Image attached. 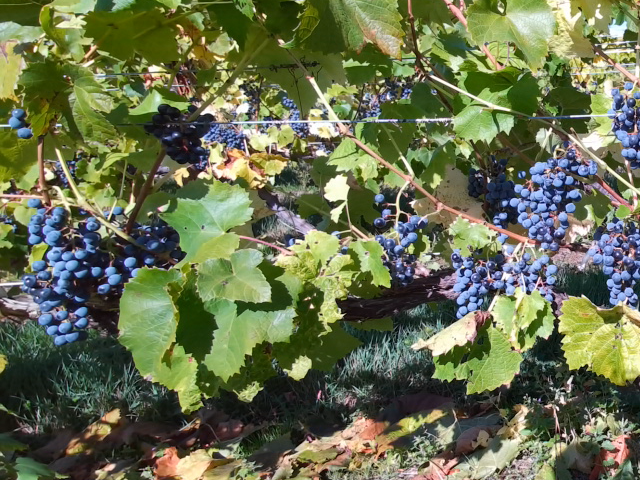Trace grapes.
<instances>
[{
  "label": "grapes",
  "mask_w": 640,
  "mask_h": 480,
  "mask_svg": "<svg viewBox=\"0 0 640 480\" xmlns=\"http://www.w3.org/2000/svg\"><path fill=\"white\" fill-rule=\"evenodd\" d=\"M27 205L31 209H36L29 218L27 232L31 235L28 238L30 245H40L45 242L50 246L44 251L45 258L52 267V273L45 271L48 264L44 260L35 261L31 269L35 274H27L21 277L24 285L20 290L24 294L32 296V302L39 305L40 311L44 314L38 319L40 326H46L45 333L54 336L56 346H66L68 343L76 341H86L89 334L86 331H73L87 328L90 319V308L86 305H77L72 313L77 319L72 322H62L66 320L70 313L61 310L55 315L51 312L55 307H60L65 300L71 299L73 304H82L89 299V293L83 289H74V279H83L88 275L93 278H105V283L97 287L99 295H105L111 287L117 286L122 281L128 283L139 272L138 260L135 257L137 248L127 244L123 248L125 256L116 257L109 266V255L97 250V245L101 242L102 236L96 232L101 229V224L95 217H88L86 223L80 226L83 236L77 240V244L82 249L65 251L63 247V232L61 225L65 223L67 210L64 207H54L50 210L43 207L40 198H30ZM49 281L52 279L50 287H42L37 284L38 280Z\"/></svg>",
  "instance_id": "obj_1"
},
{
  "label": "grapes",
  "mask_w": 640,
  "mask_h": 480,
  "mask_svg": "<svg viewBox=\"0 0 640 480\" xmlns=\"http://www.w3.org/2000/svg\"><path fill=\"white\" fill-rule=\"evenodd\" d=\"M572 145L570 140L563 143L565 148ZM561 167L563 170L572 172L583 178L594 176L598 171V163L590 158L587 164H581L577 159V152L573 148H569L564 158H549L545 162H535L530 168V180L540 186L536 191H531L523 184H516L513 180L506 181V174L501 172L496 177V183L488 182L486 189V200L493 204L495 200H500L499 205L503 208L509 206L513 210V216L509 217L506 211L496 212L492 216V222L500 229H506L508 224H521L523 229H527V237L532 240H538L542 243L543 249H550L552 252H558L561 245L557 239L563 240L570 224L567 221V213H575L577 205L569 202L565 205L564 210L558 214V227H553L554 220L550 217V211H557L558 204L562 199L574 200L580 202L583 194L576 188L564 189L574 185L578 187L580 181L571 174L564 171L550 172L544 175L549 169Z\"/></svg>",
  "instance_id": "obj_2"
},
{
  "label": "grapes",
  "mask_w": 640,
  "mask_h": 480,
  "mask_svg": "<svg viewBox=\"0 0 640 480\" xmlns=\"http://www.w3.org/2000/svg\"><path fill=\"white\" fill-rule=\"evenodd\" d=\"M449 259L452 261V267L457 272V281L455 283L454 291L459 294L455 299L456 317L462 319L469 312L476 311L479 307L485 304L483 298H478L477 295L485 296L490 289H505L507 295H511L515 292L516 286L513 284L516 281V277L511 275L505 282L501 279L506 273L514 271L519 276L517 281L520 284L526 282V285L521 287L523 292H533L535 285L540 279L538 272H541L544 265L550 262V256L548 254H542L539 258H536L532 264H528L532 259L529 253H524L520 260L515 265L510 263H504L505 257L502 254H498L496 257H490L485 266H476L474 271L472 268L475 266V258L473 256L461 255L459 249H454L449 254Z\"/></svg>",
  "instance_id": "obj_3"
},
{
  "label": "grapes",
  "mask_w": 640,
  "mask_h": 480,
  "mask_svg": "<svg viewBox=\"0 0 640 480\" xmlns=\"http://www.w3.org/2000/svg\"><path fill=\"white\" fill-rule=\"evenodd\" d=\"M627 226L628 229L625 230V222L617 216H614L612 221H608L606 229L610 233L622 234L624 232V236L627 237L626 240L623 236H614L611 241L610 236L603 233L604 229L598 227L592 236V239L597 241V248L591 247L587 254L593 257V262L596 265H606L603 268V273L609 277L605 283L606 289L610 291L609 304L617 306L619 302L628 299V305L632 309H636L639 297L634 288L627 286L621 291L622 284L620 283L625 280L628 285H635L640 279V230L633 222H628ZM615 247H621L626 252L634 247V258L627 254L622 255V252L616 250Z\"/></svg>",
  "instance_id": "obj_4"
},
{
  "label": "grapes",
  "mask_w": 640,
  "mask_h": 480,
  "mask_svg": "<svg viewBox=\"0 0 640 480\" xmlns=\"http://www.w3.org/2000/svg\"><path fill=\"white\" fill-rule=\"evenodd\" d=\"M213 120L214 117L211 114H201L197 117V121L199 123L203 122V124H198L196 128H186L184 130L187 140L192 143L186 146V150L181 148L183 146V134L176 126L146 124L144 129L149 133H153L159 141L164 142L167 147L163 150V153L171 161L176 160L179 164H187L188 162L195 164L200 161V156L206 154V150L201 147V138H204L210 132L211 126L207 123Z\"/></svg>",
  "instance_id": "obj_5"
},
{
  "label": "grapes",
  "mask_w": 640,
  "mask_h": 480,
  "mask_svg": "<svg viewBox=\"0 0 640 480\" xmlns=\"http://www.w3.org/2000/svg\"><path fill=\"white\" fill-rule=\"evenodd\" d=\"M611 95L614 97V103L608 112H622V116L609 117L615 120V123L610 125V129L621 141L623 147H630L624 148L621 156L631 161L630 168L636 171L640 168V105L635 109L633 107L636 105V100L640 99V91H635L632 97H628L626 104L619 88H613Z\"/></svg>",
  "instance_id": "obj_6"
},
{
  "label": "grapes",
  "mask_w": 640,
  "mask_h": 480,
  "mask_svg": "<svg viewBox=\"0 0 640 480\" xmlns=\"http://www.w3.org/2000/svg\"><path fill=\"white\" fill-rule=\"evenodd\" d=\"M428 225L426 218H420L418 215H412L409 222L399 221L397 223L399 244H396L394 238H387L383 235L376 234L374 239L386 250V257L394 262L396 273L395 278H399L404 285L409 284L408 280L414 277V268L406 267L405 264H412L417 260L415 254L403 253L410 244H414L418 240L416 230H423Z\"/></svg>",
  "instance_id": "obj_7"
},
{
  "label": "grapes",
  "mask_w": 640,
  "mask_h": 480,
  "mask_svg": "<svg viewBox=\"0 0 640 480\" xmlns=\"http://www.w3.org/2000/svg\"><path fill=\"white\" fill-rule=\"evenodd\" d=\"M135 228L143 232L141 236L137 231H133L131 236L144 245L145 250H142L140 255L143 257L142 263L145 266H154L157 263V258L149 252L163 254L168 251L177 262H183L186 259V253L177 247L182 236L172 226H167L165 220L158 219L152 225L137 222Z\"/></svg>",
  "instance_id": "obj_8"
},
{
  "label": "grapes",
  "mask_w": 640,
  "mask_h": 480,
  "mask_svg": "<svg viewBox=\"0 0 640 480\" xmlns=\"http://www.w3.org/2000/svg\"><path fill=\"white\" fill-rule=\"evenodd\" d=\"M27 111L23 108H15L12 111V117L7 119V124L11 125V129L16 130V135L22 140H29L33 136V132L26 128V120L24 117Z\"/></svg>",
  "instance_id": "obj_9"
},
{
  "label": "grapes",
  "mask_w": 640,
  "mask_h": 480,
  "mask_svg": "<svg viewBox=\"0 0 640 480\" xmlns=\"http://www.w3.org/2000/svg\"><path fill=\"white\" fill-rule=\"evenodd\" d=\"M157 115H153L151 120L153 122L164 123L166 118H179L181 116V111L177 107H173L169 104H160L156 108Z\"/></svg>",
  "instance_id": "obj_10"
},
{
  "label": "grapes",
  "mask_w": 640,
  "mask_h": 480,
  "mask_svg": "<svg viewBox=\"0 0 640 480\" xmlns=\"http://www.w3.org/2000/svg\"><path fill=\"white\" fill-rule=\"evenodd\" d=\"M476 173L477 170L475 168H471L469 170V174L471 176L469 177L470 184L468 185V194L473 198H477L484 193V189L482 188L484 184V178L482 176L475 177L474 175Z\"/></svg>",
  "instance_id": "obj_11"
},
{
  "label": "grapes",
  "mask_w": 640,
  "mask_h": 480,
  "mask_svg": "<svg viewBox=\"0 0 640 480\" xmlns=\"http://www.w3.org/2000/svg\"><path fill=\"white\" fill-rule=\"evenodd\" d=\"M559 271V268L556 265H549L544 272V280L548 285H553L556 282V278L553 275H556Z\"/></svg>",
  "instance_id": "obj_12"
}]
</instances>
